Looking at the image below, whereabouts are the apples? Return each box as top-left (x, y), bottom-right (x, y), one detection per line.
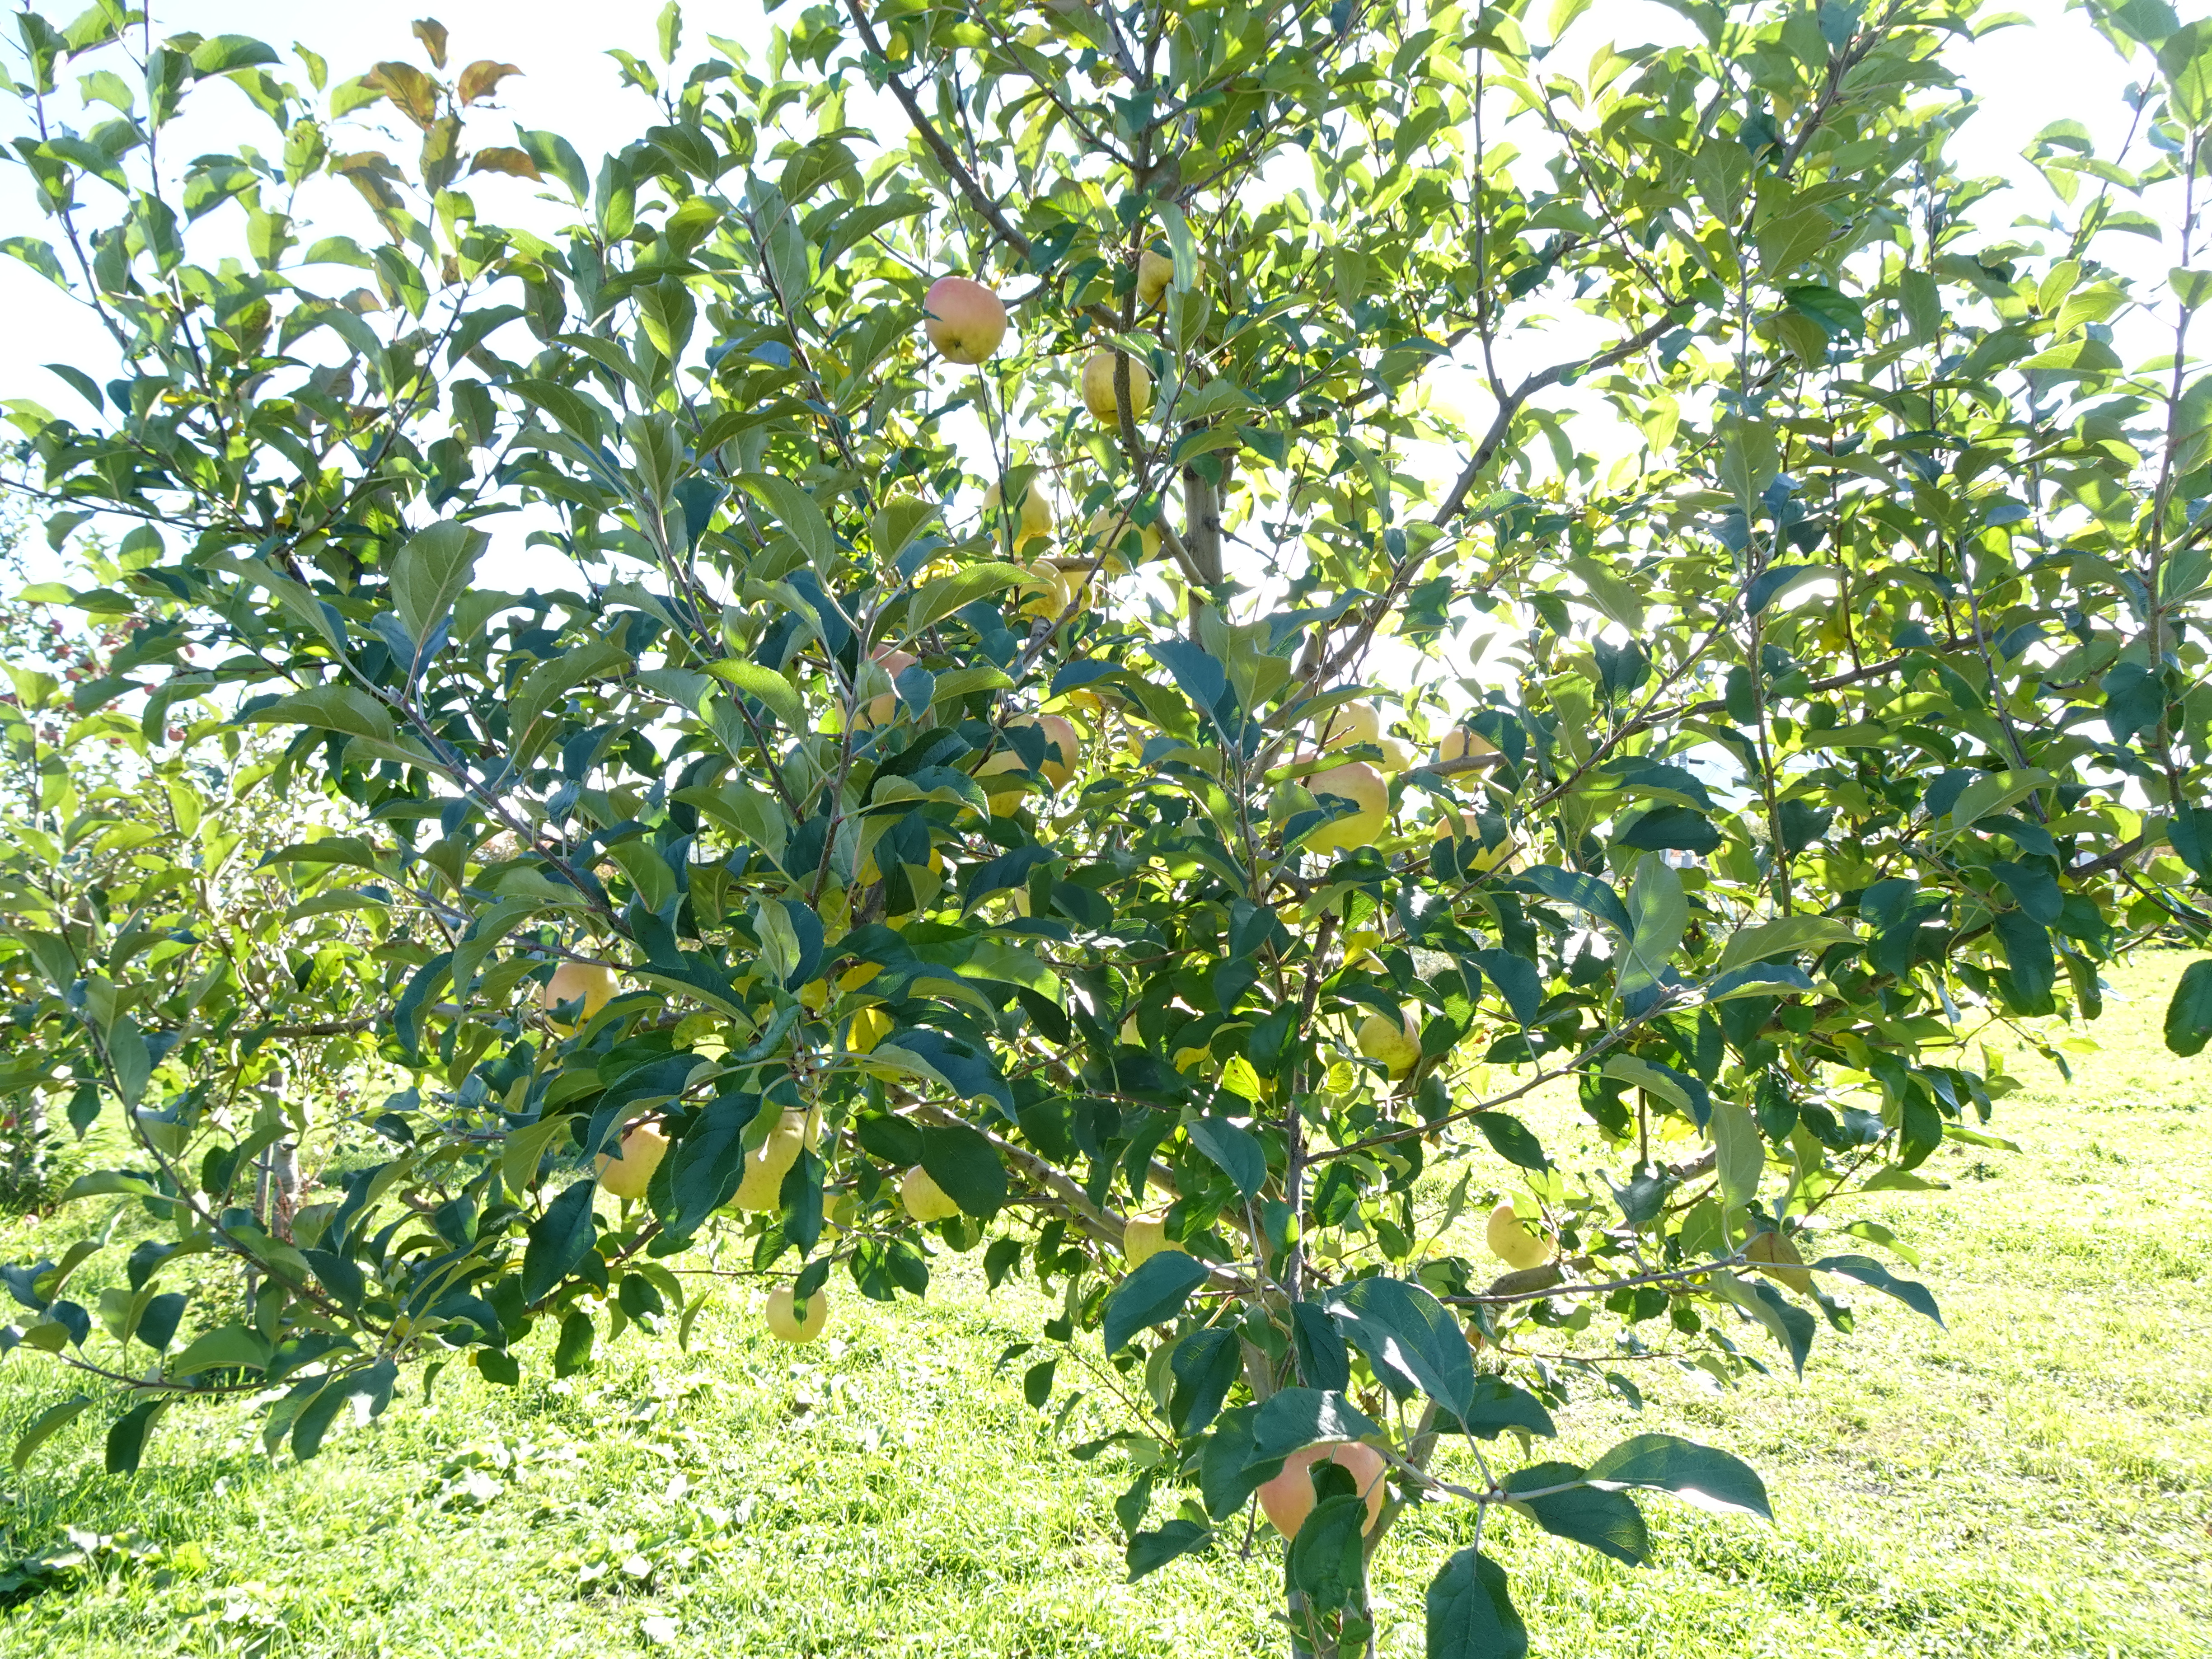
top-left (1221, 74), bottom-right (1244, 95)
top-left (1435, 807), bottom-right (1516, 875)
top-left (1360, 740), bottom-right (1410, 788)
top-left (1282, 752), bottom-right (1390, 861)
top-left (1068, 633), bottom-right (1090, 654)
top-left (540, 958), bottom-right (622, 1041)
top-left (991, 562), bottom-right (1069, 627)
top-left (1314, 696), bottom-right (1381, 764)
top-left (833, 637), bottom-right (928, 744)
top-left (765, 1283), bottom-right (827, 1343)
top-left (1121, 1212), bottom-right (1196, 1280)
top-left (923, 274), bottom-right (1009, 367)
top-left (1255, 1437), bottom-right (1385, 1547)
top-left (1075, 278), bottom-right (1126, 335)
top-left (1355, 1004), bottom-right (1427, 1084)
top-left (1219, 352), bottom-right (1253, 389)
top-left (595, 1116), bottom-right (685, 1199)
top-left (2087, 886), bottom-right (2123, 927)
top-left (992, 715), bottom-right (1078, 799)
top-left (1015, 877), bottom-right (1060, 923)
top-left (711, 1103), bottom-right (816, 1212)
top-left (1870, 603), bottom-right (1889, 619)
top-left (1485, 1204), bottom-right (1554, 1272)
top-left (1067, 671), bottom-right (1109, 713)
top-left (1089, 502), bottom-right (1165, 574)
top-left (804, 1182), bottom-right (855, 1238)
top-left (1081, 353), bottom-right (1151, 427)
top-left (954, 737), bottom-right (1029, 819)
top-left (1132, 241), bottom-right (1207, 315)
top-left (774, 1097), bottom-right (826, 1150)
top-left (1437, 730), bottom-right (1501, 793)
top-left (2079, 796), bottom-right (2111, 822)
top-left (900, 1160), bottom-right (966, 1223)
top-left (1032, 553), bottom-right (1100, 626)
top-left (1286, 342), bottom-right (1298, 353)
top-left (982, 474), bottom-right (1056, 554)
top-left (912, 846), bottom-right (945, 882)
